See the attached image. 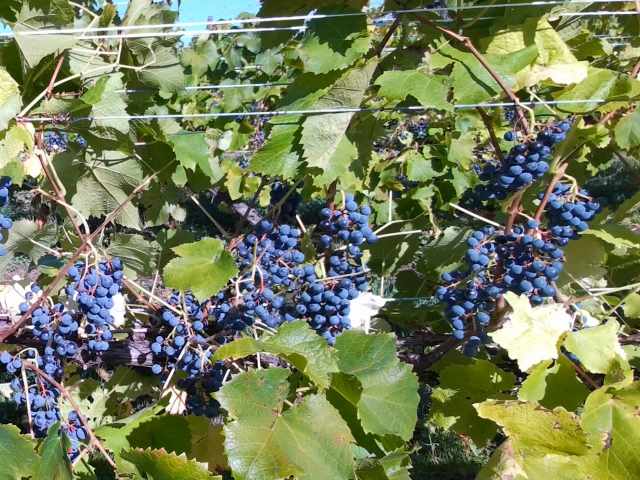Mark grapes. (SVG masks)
Masks as SVG:
<instances>
[{"instance_id": "1", "label": "grapes", "mask_w": 640, "mask_h": 480, "mask_svg": "<svg viewBox=\"0 0 640 480\" xmlns=\"http://www.w3.org/2000/svg\"><path fill=\"white\" fill-rule=\"evenodd\" d=\"M570 191L569 184L556 182L548 202V209L545 211V217L550 219L548 229L556 238V244L559 247L542 238L525 235L530 229L540 227L538 220H528L525 227H515L513 233L498 235L495 238L496 243L488 242L478 246L482 239L495 233V228L490 225H484L481 230H477L471 238L466 240V245L472 247L466 250L467 262L472 272H479L477 281H469L466 289L459 287L449 289L444 286L436 288L439 300L447 303L444 312L455 328L452 333L454 339L462 340L465 337L466 321L461 316H465L468 310L482 309L483 311L475 315V321L478 324H488L492 316L487 312H493L496 309L495 301L490 297L500 299L507 289L528 295L532 287H536V293L531 296V303L535 306H540L545 297H554L557 294V289L548 281L559 280L564 264L556 261L550 266L545 265L542 260H536L531 263V266L524 268L534 259L532 247L546 252L551 259L561 258L564 250L560 247H566L571 239L580 240L582 235L577 232L586 231L587 221H592L596 214L603 211V206L608 204L606 197H597L594 201L588 202L579 200L576 203H563L558 200L559 196H568ZM494 253L497 261L505 260V267L508 269L502 285H489L488 275L482 270L491 262L489 256Z\"/></svg>"}, {"instance_id": "2", "label": "grapes", "mask_w": 640, "mask_h": 480, "mask_svg": "<svg viewBox=\"0 0 640 480\" xmlns=\"http://www.w3.org/2000/svg\"><path fill=\"white\" fill-rule=\"evenodd\" d=\"M274 221L272 219L260 220L257 223V231L267 234L260 240L256 246L255 254L261 256L256 265L263 272V283L267 288L254 291L255 286L250 280H244L239 285V291L245 289L251 294H245L243 301L246 306L238 304L239 310L243 311V315L238 312L231 311L232 302L224 301L217 307H211L208 310L209 315H214L216 323L223 327H230L234 335H238L239 331H245L247 325H254L256 313L260 321H265L268 327H276L285 320L292 322L301 315L316 314L313 318L312 328L314 330H322L324 325L338 326L330 331H324L322 337L329 346L335 343V337L348 330L351 327V320L348 315L352 311L350 307L352 302L349 299H355L360 295L361 291H365L369 286V281L364 275L349 277L342 279L338 283V287L332 291H325L322 282H316L317 274L313 265H305L304 267L294 266L289 270L287 266L280 267L278 260L280 257L287 264L304 263L306 255L302 251H298V239L301 235L299 229H292L289 224H281L277 227L278 231L272 230ZM291 275L299 277L297 282L305 284L308 282V292H302L297 296V304L294 306H286L285 297L283 295L275 296L272 289L276 284H283L290 291L297 288V284L291 278Z\"/></svg>"}, {"instance_id": "3", "label": "grapes", "mask_w": 640, "mask_h": 480, "mask_svg": "<svg viewBox=\"0 0 640 480\" xmlns=\"http://www.w3.org/2000/svg\"><path fill=\"white\" fill-rule=\"evenodd\" d=\"M112 267L109 263L102 260L98 265V275L95 269L88 268L85 279H82V273L85 271V263L77 261L68 270V276L73 278L74 282L65 287V294L74 295L76 292L75 302L78 304V310L87 316L88 325L84 328V332L93 335L100 327L103 333L101 340L98 342L92 338L88 342V349L95 352L108 351L110 341L114 334L109 329L116 323V318L112 315L111 310L115 305L113 295L125 290L121 283L123 278V260L121 257H113L111 259Z\"/></svg>"}, {"instance_id": "4", "label": "grapes", "mask_w": 640, "mask_h": 480, "mask_svg": "<svg viewBox=\"0 0 640 480\" xmlns=\"http://www.w3.org/2000/svg\"><path fill=\"white\" fill-rule=\"evenodd\" d=\"M572 119L567 117L562 121H550L546 124L548 129L553 131H539L537 138L529 145L517 144L512 146L509 154L503 157V164L500 170H496L493 165H486L484 173L478 175L482 182L489 184L487 189L484 185L477 184L475 192L484 200H505L507 192L521 190L525 183H531L537 177H542L550 169V165L545 161L551 153V148L555 144H561L567 137L566 131L571 128Z\"/></svg>"}, {"instance_id": "5", "label": "grapes", "mask_w": 640, "mask_h": 480, "mask_svg": "<svg viewBox=\"0 0 640 480\" xmlns=\"http://www.w3.org/2000/svg\"><path fill=\"white\" fill-rule=\"evenodd\" d=\"M345 203L346 210L348 211L346 218H341L343 213L340 210H336L334 217L339 219L337 223L321 220L319 225L323 232L337 233L341 239L349 240L352 243L348 247V253L354 255V263L356 265H351L347 261H343L339 254L331 255L329 257L331 265L328 271L330 277H338L340 271L348 274L361 273L363 271L361 257L364 255V252L360 246L364 241L369 245L379 242V236L369 227V215L373 213L372 208L368 205L359 206L351 193L346 195Z\"/></svg>"}, {"instance_id": "6", "label": "grapes", "mask_w": 640, "mask_h": 480, "mask_svg": "<svg viewBox=\"0 0 640 480\" xmlns=\"http://www.w3.org/2000/svg\"><path fill=\"white\" fill-rule=\"evenodd\" d=\"M55 309L57 313H62L61 324L54 333L53 327H48L47 331H44L41 325L47 326L52 321L51 312L48 311L46 306L38 307L36 311L29 317V320L34 326L30 330V333L34 337H39L38 341L41 344H46L53 340L57 343L56 349L52 346H48L44 349V355L37 357V364L44 366L45 373H47L52 379L56 377H63L65 375V368L61 365L60 360H54V354L57 356H67L68 354H77L79 352V345L74 341L65 339L66 335L75 334L79 328V323L75 321L70 313L64 311V303L56 302Z\"/></svg>"}, {"instance_id": "7", "label": "grapes", "mask_w": 640, "mask_h": 480, "mask_svg": "<svg viewBox=\"0 0 640 480\" xmlns=\"http://www.w3.org/2000/svg\"><path fill=\"white\" fill-rule=\"evenodd\" d=\"M38 387L33 386L28 393L31 420L38 427L39 432H46L60 420V408L57 407L60 391L51 388L49 395H39Z\"/></svg>"}, {"instance_id": "8", "label": "grapes", "mask_w": 640, "mask_h": 480, "mask_svg": "<svg viewBox=\"0 0 640 480\" xmlns=\"http://www.w3.org/2000/svg\"><path fill=\"white\" fill-rule=\"evenodd\" d=\"M162 320L167 321V325L170 327H176L175 331L181 336H175L173 338V347L165 346L163 347L162 342L164 341L163 336H157L155 338V343H151L149 345V350L156 357H160L161 353H164L168 356H173L178 352L182 351V348L185 342L190 340V337L187 336L188 329L185 325H179V320L177 315L170 309L165 308L162 314Z\"/></svg>"}, {"instance_id": "9", "label": "grapes", "mask_w": 640, "mask_h": 480, "mask_svg": "<svg viewBox=\"0 0 640 480\" xmlns=\"http://www.w3.org/2000/svg\"><path fill=\"white\" fill-rule=\"evenodd\" d=\"M68 420L73 421L74 429L72 432L69 430L66 423H62L57 430V436L62 437V432H65L71 441L72 452L68 453L67 460L74 462L79 457L78 445L82 440L89 438V435L85 428L82 426L81 420L74 411L68 413Z\"/></svg>"}, {"instance_id": "10", "label": "grapes", "mask_w": 640, "mask_h": 480, "mask_svg": "<svg viewBox=\"0 0 640 480\" xmlns=\"http://www.w3.org/2000/svg\"><path fill=\"white\" fill-rule=\"evenodd\" d=\"M201 366L202 359L200 358V355L192 352L190 349H187L185 355L180 359L177 370L189 371V377H197L200 375Z\"/></svg>"}, {"instance_id": "11", "label": "grapes", "mask_w": 640, "mask_h": 480, "mask_svg": "<svg viewBox=\"0 0 640 480\" xmlns=\"http://www.w3.org/2000/svg\"><path fill=\"white\" fill-rule=\"evenodd\" d=\"M185 305L188 308L187 314L194 315V321L192 323V329L196 332L204 331L205 323L201 321L203 318V307L199 306L198 302L194 303V295L189 294L185 296Z\"/></svg>"}, {"instance_id": "12", "label": "grapes", "mask_w": 640, "mask_h": 480, "mask_svg": "<svg viewBox=\"0 0 640 480\" xmlns=\"http://www.w3.org/2000/svg\"><path fill=\"white\" fill-rule=\"evenodd\" d=\"M257 241V236L255 234H248L245 237V242L238 241L236 243V249L239 251V254L243 258L242 264L244 266L250 265L253 261V254L250 251V248L255 246V242Z\"/></svg>"}, {"instance_id": "13", "label": "grapes", "mask_w": 640, "mask_h": 480, "mask_svg": "<svg viewBox=\"0 0 640 480\" xmlns=\"http://www.w3.org/2000/svg\"><path fill=\"white\" fill-rule=\"evenodd\" d=\"M0 362L6 365L8 373H16L17 369H21L23 361L20 359H13L10 352H3L0 354Z\"/></svg>"}, {"instance_id": "14", "label": "grapes", "mask_w": 640, "mask_h": 480, "mask_svg": "<svg viewBox=\"0 0 640 480\" xmlns=\"http://www.w3.org/2000/svg\"><path fill=\"white\" fill-rule=\"evenodd\" d=\"M481 343L482 339L480 337H469L463 345V353L470 358H474L476 356V350L479 348Z\"/></svg>"}, {"instance_id": "15", "label": "grapes", "mask_w": 640, "mask_h": 480, "mask_svg": "<svg viewBox=\"0 0 640 480\" xmlns=\"http://www.w3.org/2000/svg\"><path fill=\"white\" fill-rule=\"evenodd\" d=\"M464 276H465V273H464L463 271H455V270H452L450 273H448V272H444V273L441 275V278H442L444 281H447V282H449V283H453V282H455L457 279L462 280V279L464 278Z\"/></svg>"}, {"instance_id": "16", "label": "grapes", "mask_w": 640, "mask_h": 480, "mask_svg": "<svg viewBox=\"0 0 640 480\" xmlns=\"http://www.w3.org/2000/svg\"><path fill=\"white\" fill-rule=\"evenodd\" d=\"M170 293L173 294L169 299H162L165 303H172L173 305H177L180 302L181 292L179 290L171 289Z\"/></svg>"}, {"instance_id": "17", "label": "grapes", "mask_w": 640, "mask_h": 480, "mask_svg": "<svg viewBox=\"0 0 640 480\" xmlns=\"http://www.w3.org/2000/svg\"><path fill=\"white\" fill-rule=\"evenodd\" d=\"M41 286L39 283H32L31 290L25 293V298L27 300H32L34 298V294H38L40 292Z\"/></svg>"}]
</instances>
